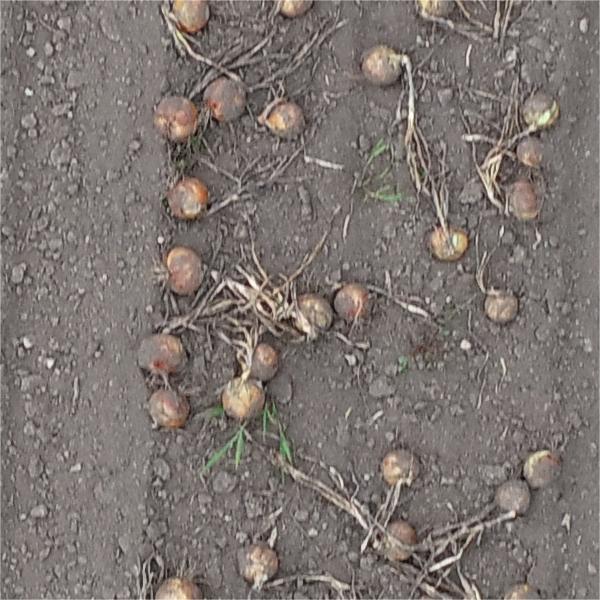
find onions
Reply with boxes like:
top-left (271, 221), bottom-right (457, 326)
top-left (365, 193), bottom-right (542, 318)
top-left (166, 174), bottom-right (208, 217)
top-left (520, 94), bottom-right (555, 131)
top-left (155, 95), bottom-right (195, 139)
top-left (203, 75), bottom-right (246, 121)
top-left (238, 542), bottom-right (277, 582)
top-left (262, 98), bottom-right (302, 136)
top-left (155, 576), bottom-right (201, 599)
top-left (427, 223), bottom-right (467, 260)
top-left (508, 177), bottom-right (541, 220)
top-left (522, 449), bottom-right (558, 485)
top-left (274, 0), bottom-right (310, 20)
top-left (148, 389), bottom-right (187, 427)
top-left (164, 245), bottom-right (202, 293)
top-left (247, 344), bottom-right (280, 377)
top-left (294, 294), bottom-right (332, 333)
top-left (220, 378), bottom-right (264, 419)
top-left (332, 283), bottom-right (367, 320)
top-left (410, 0), bottom-right (455, 14)
top-left (515, 137), bottom-right (542, 165)
top-left (136, 331), bottom-right (184, 373)
top-left (386, 517), bottom-right (417, 551)
top-left (377, 452), bottom-right (412, 485)
top-left (168, 1), bottom-right (209, 33)
top-left (482, 287), bottom-right (515, 321)
top-left (502, 584), bottom-right (537, 600)
top-left (363, 44), bottom-right (403, 83)
top-left (494, 479), bottom-right (528, 514)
